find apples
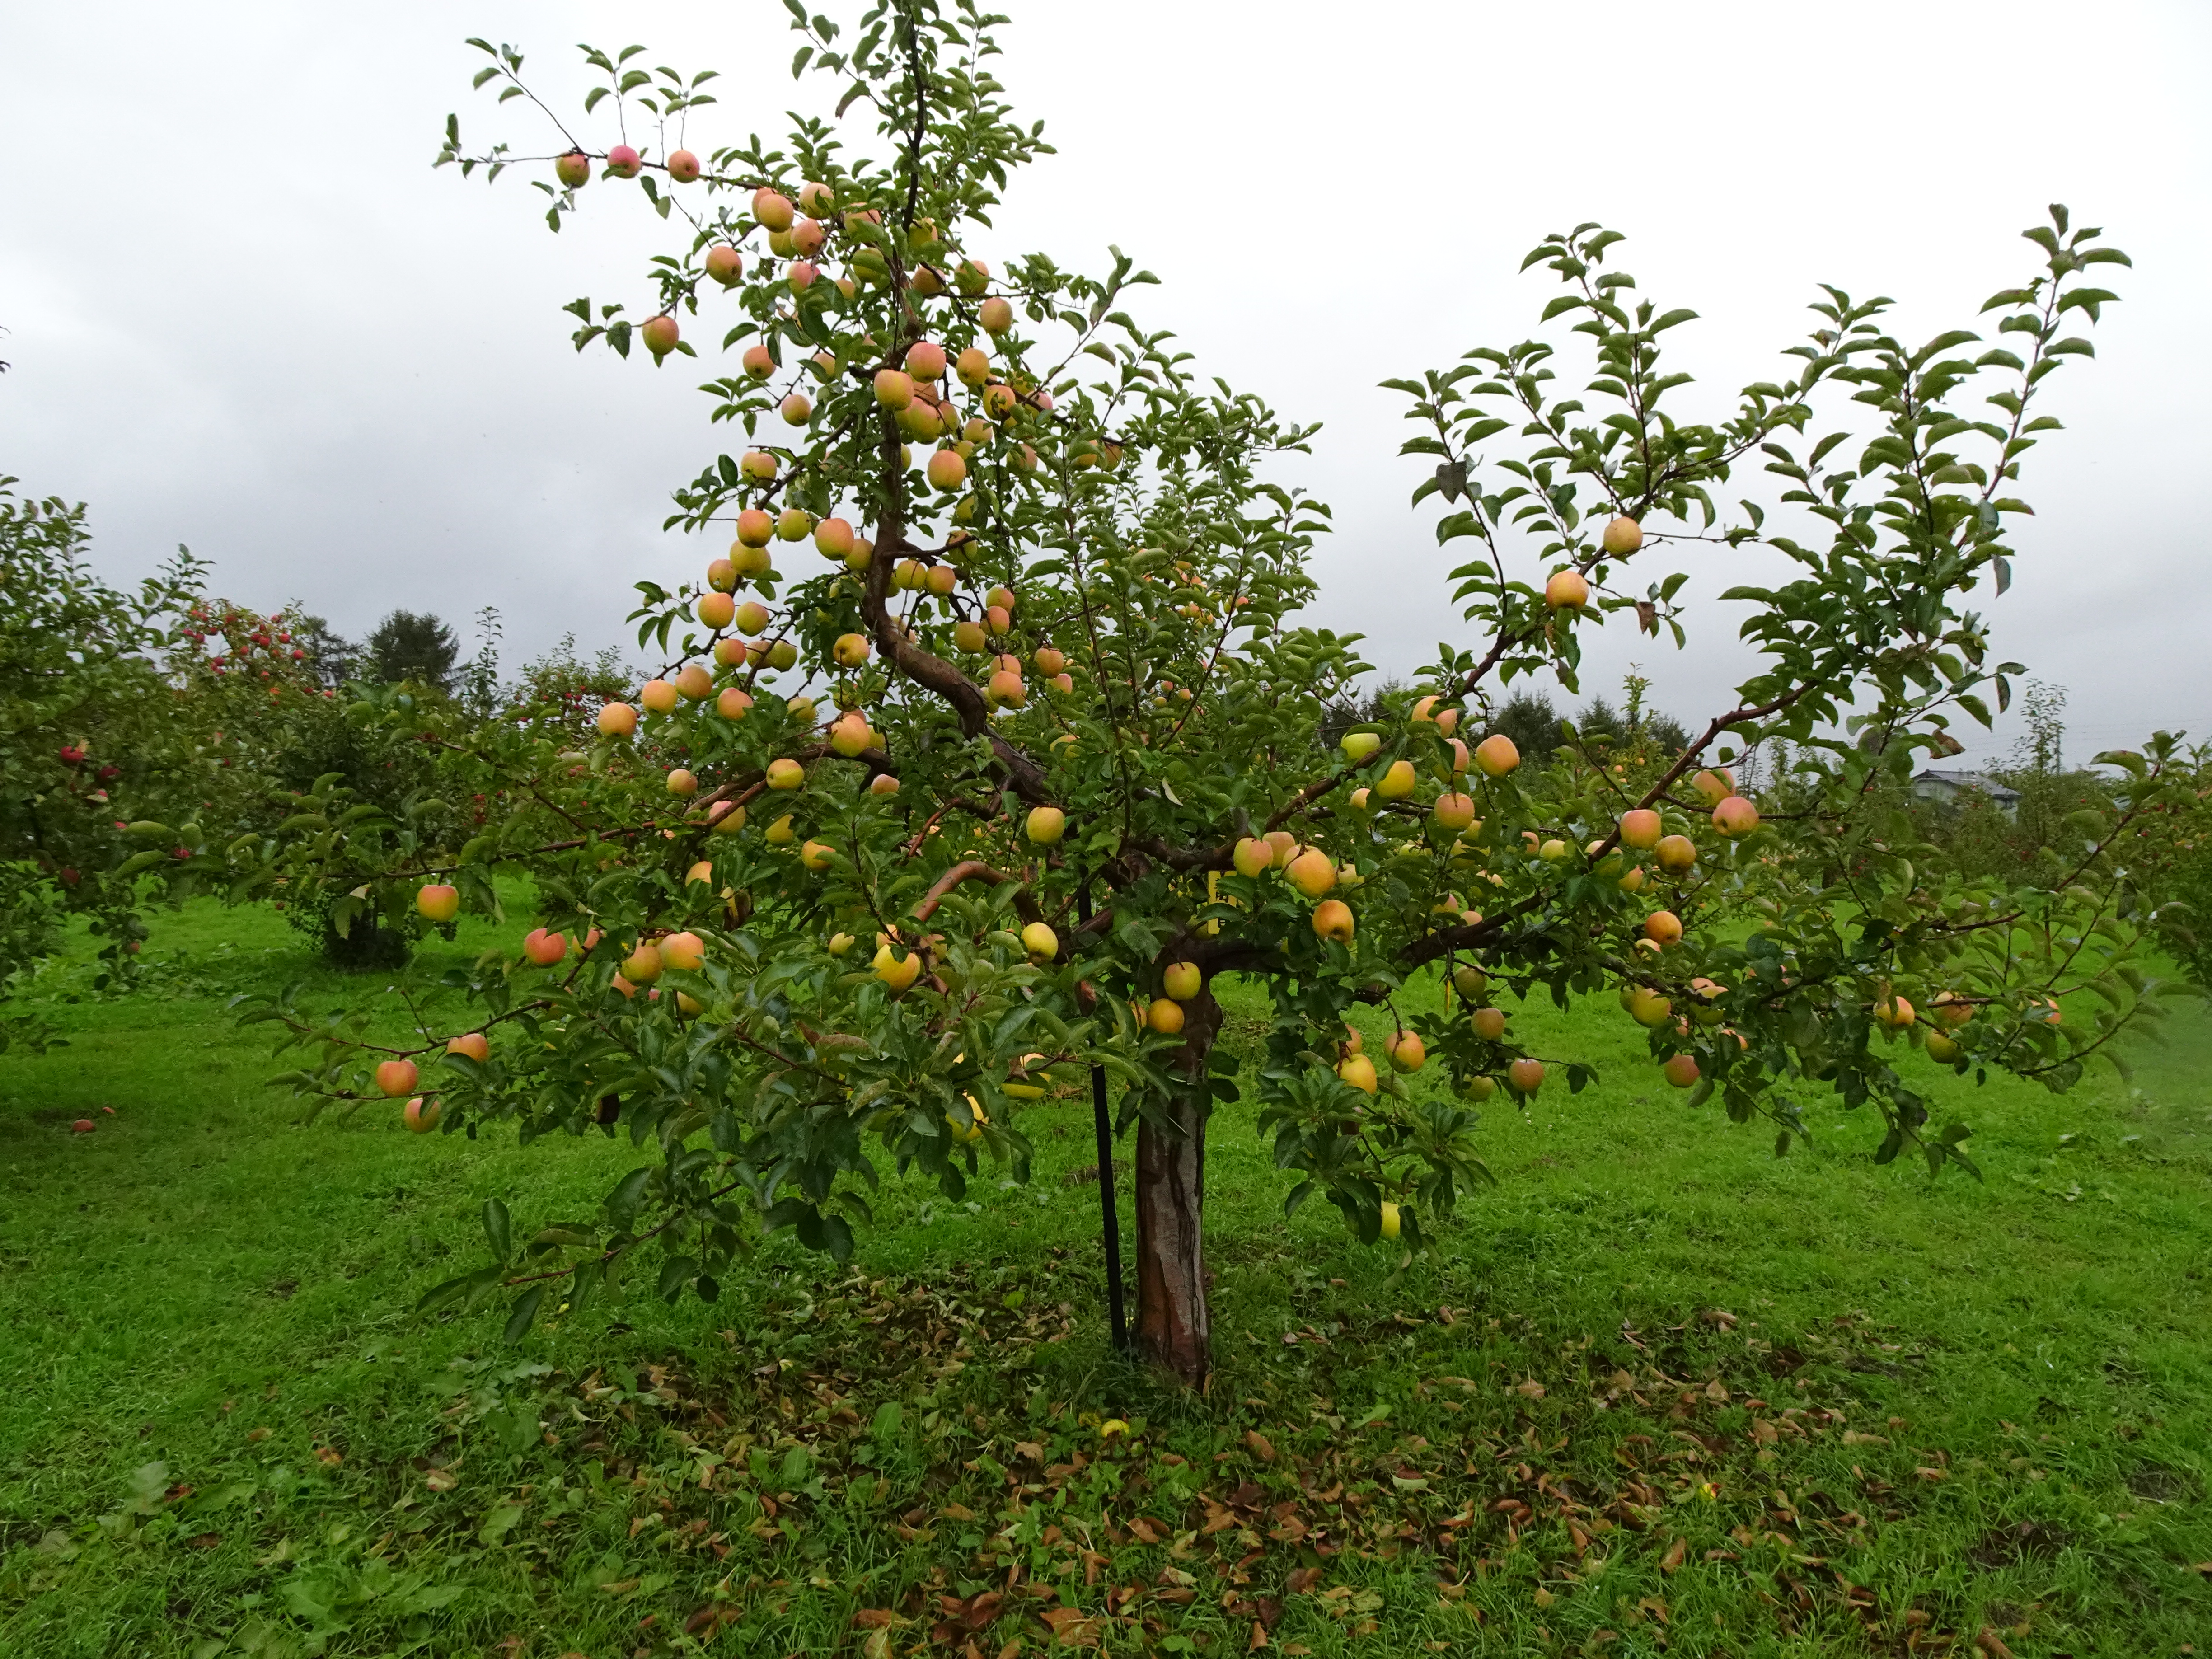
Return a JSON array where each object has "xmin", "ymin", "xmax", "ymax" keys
[
  {"xmin": 677, "ymin": 991, "xmax": 705, "ymax": 1020},
  {"xmin": 1164, "ymin": 962, "xmax": 1202, "ymax": 1000},
  {"xmin": 736, "ymin": 509, "xmax": 773, "ymax": 548},
  {"xmin": 416, "ymin": 885, "xmax": 460, "ymax": 923},
  {"xmin": 876, "ymin": 924, "xmax": 905, "ymax": 951},
  {"xmin": 870, "ymin": 774, "xmax": 900, "ymax": 796},
  {"xmin": 597, "ymin": 702, "xmax": 637, "ymax": 738},
  {"xmin": 376, "ymin": 1059, "xmax": 418, "ymax": 1098},
  {"xmin": 556, "ymin": 152, "xmax": 590, "ymax": 188},
  {"xmin": 1463, "ymin": 1073, "xmax": 1494, "ymax": 1102},
  {"xmin": 833, "ymin": 633, "xmax": 870, "ymax": 668},
  {"xmin": 1518, "ymin": 832, "xmax": 1540, "ymax": 854},
  {"xmin": 720, "ymin": 887, "xmax": 751, "ymax": 917},
  {"xmin": 740, "ymin": 451, "xmax": 777, "ymax": 489},
  {"xmin": 1664, "ymin": 1055, "xmax": 1699, "ymax": 1088},
  {"xmin": 1034, "ymin": 648, "xmax": 1064, "ymax": 679},
  {"xmin": 828, "ymin": 932, "xmax": 857, "ymax": 959},
  {"xmin": 874, "ymin": 369, "xmax": 915, "ymax": 411},
  {"xmin": 1340, "ymin": 731, "xmax": 1381, "ymax": 761},
  {"xmin": 1690, "ymin": 977, "xmax": 1716, "ymax": 989},
  {"xmin": 912, "ymin": 264, "xmax": 945, "ymax": 299},
  {"xmin": 1262, "ymin": 831, "xmax": 1296, "ymax": 870},
  {"xmin": 1631, "ymin": 988, "xmax": 1671, "ymax": 1028},
  {"xmin": 861, "ymin": 335, "xmax": 877, "ymax": 359},
  {"xmin": 610, "ymin": 971, "xmax": 640, "ymax": 1000},
  {"xmin": 883, "ymin": 576, "xmax": 901, "ymax": 598},
  {"xmin": 706, "ymin": 246, "xmax": 742, "ymax": 285},
  {"xmin": 814, "ymin": 518, "xmax": 854, "ymax": 561},
  {"xmin": 648, "ymin": 988, "xmax": 661, "ymax": 1000},
  {"xmin": 1629, "ymin": 939, "xmax": 1661, "ymax": 967},
  {"xmin": 698, "ymin": 592, "xmax": 735, "ymax": 630},
  {"xmin": 988, "ymin": 654, "xmax": 1021, "ymax": 679},
  {"xmin": 1471, "ymin": 870, "xmax": 1503, "ymax": 901},
  {"xmin": 2030, "ymin": 998, "xmax": 2060, "ymax": 1024},
  {"xmin": 1695, "ymin": 986, "xmax": 1729, "ymax": 1000},
  {"xmin": 1312, "ymin": 899, "xmax": 1354, "ymax": 947},
  {"xmin": 964, "ymin": 418, "xmax": 992, "ymax": 445},
  {"xmin": 831, "ymin": 715, "xmax": 870, "ymax": 758},
  {"xmin": 769, "ymin": 224, "xmax": 797, "ymax": 258},
  {"xmin": 937, "ymin": 400, "xmax": 959, "ymax": 437},
  {"xmin": 685, "ymin": 861, "xmax": 725, "ymax": 886},
  {"xmin": 787, "ymin": 261, "xmax": 821, "ymax": 291},
  {"xmin": 1619, "ymin": 809, "xmax": 1662, "ymax": 850},
  {"xmin": 1644, "ymin": 911, "xmax": 1682, "ymax": 944},
  {"xmin": 845, "ymin": 539, "xmax": 874, "ymax": 571},
  {"xmin": 1603, "ymin": 516, "xmax": 1643, "ymax": 556},
  {"xmin": 1411, "ymin": 695, "xmax": 1457, "ymax": 740},
  {"xmin": 1873, "ymin": 996, "xmax": 1914, "ymax": 1026},
  {"xmin": 925, "ymin": 566, "xmax": 956, "ymax": 597},
  {"xmin": 945, "ymin": 1092, "xmax": 989, "ymax": 1145},
  {"xmin": 893, "ymin": 396, "xmax": 923, "ymax": 431},
  {"xmin": 921, "ymin": 215, "xmax": 938, "ymax": 242},
  {"xmin": 641, "ymin": 679, "xmax": 678, "ymax": 718},
  {"xmin": 907, "ymin": 342, "xmax": 946, "ymax": 384},
  {"xmin": 982, "ymin": 385, "xmax": 1015, "ymax": 420},
  {"xmin": 1475, "ymin": 734, "xmax": 1519, "ymax": 779},
  {"xmin": 798, "ymin": 182, "xmax": 835, "ymax": 220},
  {"xmin": 834, "ymin": 278, "xmax": 856, "ymax": 301},
  {"xmin": 1471, "ymin": 1008, "xmax": 1505, "ymax": 1042},
  {"xmin": 666, "ymin": 768, "xmax": 698, "ymax": 800},
  {"xmin": 1711, "ymin": 796, "xmax": 1759, "ymax": 841},
  {"xmin": 889, "ymin": 616, "xmax": 907, "ymax": 635},
  {"xmin": 947, "ymin": 440, "xmax": 975, "ymax": 460},
  {"xmin": 1344, "ymin": 1024, "xmax": 1362, "ymax": 1055},
  {"xmin": 1003, "ymin": 415, "xmax": 1017, "ymax": 429},
  {"xmin": 1545, "ymin": 571, "xmax": 1589, "ymax": 615},
  {"xmin": 1399, "ymin": 844, "xmax": 1427, "ymax": 856},
  {"xmin": 675, "ymin": 665, "xmax": 712, "ymax": 704},
  {"xmin": 1619, "ymin": 983, "xmax": 1645, "ymax": 1013},
  {"xmin": 1633, "ymin": 875, "xmax": 1660, "ymax": 897},
  {"xmin": 1926, "ymin": 1028, "xmax": 1962, "ymax": 1064},
  {"xmin": 753, "ymin": 549, "xmax": 771, "ymax": 579},
  {"xmin": 736, "ymin": 602, "xmax": 769, "ymax": 637},
  {"xmin": 447, "ymin": 1033, "xmax": 488, "ymax": 1062},
  {"xmin": 1933, "ymin": 990, "xmax": 1973, "ymax": 1026},
  {"xmin": 871, "ymin": 943, "xmax": 920, "ymax": 991},
  {"xmin": 801, "ymin": 840, "xmax": 836, "ymax": 871},
  {"xmin": 853, "ymin": 247, "xmax": 884, "ymax": 283},
  {"xmin": 1656, "ymin": 835, "xmax": 1696, "ymax": 876},
  {"xmin": 1457, "ymin": 820, "xmax": 1484, "ymax": 840},
  {"xmin": 1384, "ymin": 1030, "xmax": 1425, "ymax": 1074},
  {"xmin": 901, "ymin": 442, "xmax": 911, "ymax": 475},
  {"xmin": 1376, "ymin": 760, "xmax": 1416, "ymax": 799},
  {"xmin": 1431, "ymin": 738, "xmax": 1469, "ymax": 784},
  {"xmin": 946, "ymin": 530, "xmax": 977, "ymax": 562},
  {"xmin": 607, "ymin": 146, "xmax": 641, "ymax": 179},
  {"xmin": 909, "ymin": 631, "xmax": 916, "ymax": 645},
  {"xmin": 1617, "ymin": 865, "xmax": 1644, "ymax": 892},
  {"xmin": 1045, "ymin": 673, "xmax": 1072, "ymax": 695},
  {"xmin": 1005, "ymin": 685, "xmax": 1026, "ymax": 710},
  {"xmin": 790, "ymin": 218, "xmax": 825, "ymax": 259},
  {"xmin": 1540, "ymin": 840, "xmax": 1566, "ymax": 861},
  {"xmin": 743, "ymin": 345, "xmax": 776, "ymax": 380},
  {"xmin": 757, "ymin": 193, "xmax": 794, "ymax": 233},
  {"xmin": 927, "ymin": 449, "xmax": 966, "ymax": 492},
  {"xmin": 1025, "ymin": 391, "xmax": 1053, "ymax": 419},
  {"xmin": 1332, "ymin": 1053, "xmax": 1377, "ymax": 1096},
  {"xmin": 717, "ymin": 687, "xmax": 753, "ymax": 720},
  {"xmin": 708, "ymin": 559, "xmax": 737, "ymax": 593},
  {"xmin": 833, "ymin": 682, "xmax": 862, "ymax": 712},
  {"xmin": 766, "ymin": 758, "xmax": 805, "ymax": 791},
  {"xmin": 1455, "ymin": 964, "xmax": 1487, "ymax": 1001},
  {"xmin": 1584, "ymin": 840, "xmax": 1624, "ymax": 876},
  {"xmin": 843, "ymin": 709, "xmax": 866, "ymax": 728},
  {"xmin": 1145, "ymin": 998, "xmax": 1184, "ymax": 1034},
  {"xmin": 956, "ymin": 495, "xmax": 980, "ymax": 527},
  {"xmin": 1007, "ymin": 444, "xmax": 1038, "ymax": 470},
  {"xmin": 1288, "ymin": 850, "xmax": 1336, "ymax": 900},
  {"xmin": 954, "ymin": 260, "xmax": 989, "ymax": 290},
  {"xmin": 1349, "ymin": 788, "xmax": 1371, "ymax": 809},
  {"xmin": 1747, "ymin": 964, "xmax": 1789, "ymax": 985},
  {"xmin": 714, "ymin": 639, "xmax": 747, "ymax": 668},
  {"xmin": 1432, "ymin": 893, "xmax": 1458, "ymax": 924},
  {"xmin": 1021, "ymin": 922, "xmax": 1059, "ymax": 966},
  {"xmin": 980, "ymin": 297, "xmax": 1013, "ymax": 336},
  {"xmin": 1721, "ymin": 1029, "xmax": 1748, "ymax": 1051},
  {"xmin": 618, "ymin": 946, "xmax": 662, "ymax": 985},
  {"xmin": 913, "ymin": 381, "xmax": 939, "ymax": 406},
  {"xmin": 1004, "ymin": 371, "xmax": 1036, "ymax": 396},
  {"xmin": 1460, "ymin": 911, "xmax": 1482, "ymax": 925},
  {"xmin": 1027, "ymin": 807, "xmax": 1065, "ymax": 847},
  {"xmin": 1509, "ymin": 1059, "xmax": 1544, "ymax": 1091},
  {"xmin": 986, "ymin": 586, "xmax": 1015, "ymax": 613},
  {"xmin": 730, "ymin": 539, "xmax": 768, "ymax": 576},
  {"xmin": 859, "ymin": 672, "xmax": 887, "ymax": 701},
  {"xmin": 1690, "ymin": 768, "xmax": 1736, "ymax": 808},
  {"xmin": 841, "ymin": 201, "xmax": 881, "ymax": 236},
  {"xmin": 786, "ymin": 696, "xmax": 817, "ymax": 723},
  {"xmin": 1095, "ymin": 441, "xmax": 1122, "ymax": 472},
  {"xmin": 773, "ymin": 640, "xmax": 797, "ymax": 672},
  {"xmin": 1072, "ymin": 439, "xmax": 1098, "ymax": 471},
  {"xmin": 954, "ymin": 622, "xmax": 986, "ymax": 654},
  {"xmin": 897, "ymin": 560, "xmax": 926, "ymax": 591},
  {"xmin": 781, "ymin": 395, "xmax": 812, "ymax": 427},
  {"xmin": 811, "ymin": 353, "xmax": 836, "ymax": 384},
  {"xmin": 981, "ymin": 372, "xmax": 997, "ymax": 389},
  {"xmin": 1434, "ymin": 792, "xmax": 1475, "ymax": 832},
  {"xmin": 403, "ymin": 1098, "xmax": 440, "ymax": 1134},
  {"xmin": 980, "ymin": 606, "xmax": 1010, "ymax": 636},
  {"xmin": 1669, "ymin": 1014, "xmax": 1687, "ymax": 1038},
  {"xmin": 659, "ymin": 932, "xmax": 704, "ymax": 971},
  {"xmin": 1333, "ymin": 864, "xmax": 1365, "ymax": 891},
  {"xmin": 909, "ymin": 400, "xmax": 944, "ymax": 445},
  {"xmin": 765, "ymin": 814, "xmax": 800, "ymax": 848},
  {"xmin": 752, "ymin": 187, "xmax": 779, "ymax": 223},
  {"xmin": 571, "ymin": 927, "xmax": 606, "ymax": 957},
  {"xmin": 641, "ymin": 315, "xmax": 679, "ymax": 355},
  {"xmin": 988, "ymin": 671, "xmax": 1022, "ymax": 706},
  {"xmin": 1281, "ymin": 844, "xmax": 1319, "ymax": 881},
  {"xmin": 1125, "ymin": 1001, "xmax": 1147, "ymax": 1028},
  {"xmin": 919, "ymin": 934, "xmax": 948, "ymax": 962},
  {"xmin": 746, "ymin": 640, "xmax": 775, "ymax": 669},
  {"xmin": 1001, "ymin": 1053, "xmax": 1051, "ymax": 1100},
  {"xmin": 523, "ymin": 928, "xmax": 567, "ymax": 969},
  {"xmin": 866, "ymin": 725, "xmax": 886, "ymax": 752},
  {"xmin": 980, "ymin": 687, "xmax": 1000, "ymax": 714},
  {"xmin": 1049, "ymin": 735, "xmax": 1081, "ymax": 752},
  {"xmin": 1233, "ymin": 837, "xmax": 1273, "ymax": 879},
  {"xmin": 1380, "ymin": 1200, "xmax": 1400, "ymax": 1240},
  {"xmin": 668, "ymin": 150, "xmax": 700, "ymax": 183},
  {"xmin": 956, "ymin": 348, "xmax": 990, "ymax": 388},
  {"xmin": 709, "ymin": 801, "xmax": 745, "ymax": 836},
  {"xmin": 778, "ymin": 509, "xmax": 811, "ymax": 542}
]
